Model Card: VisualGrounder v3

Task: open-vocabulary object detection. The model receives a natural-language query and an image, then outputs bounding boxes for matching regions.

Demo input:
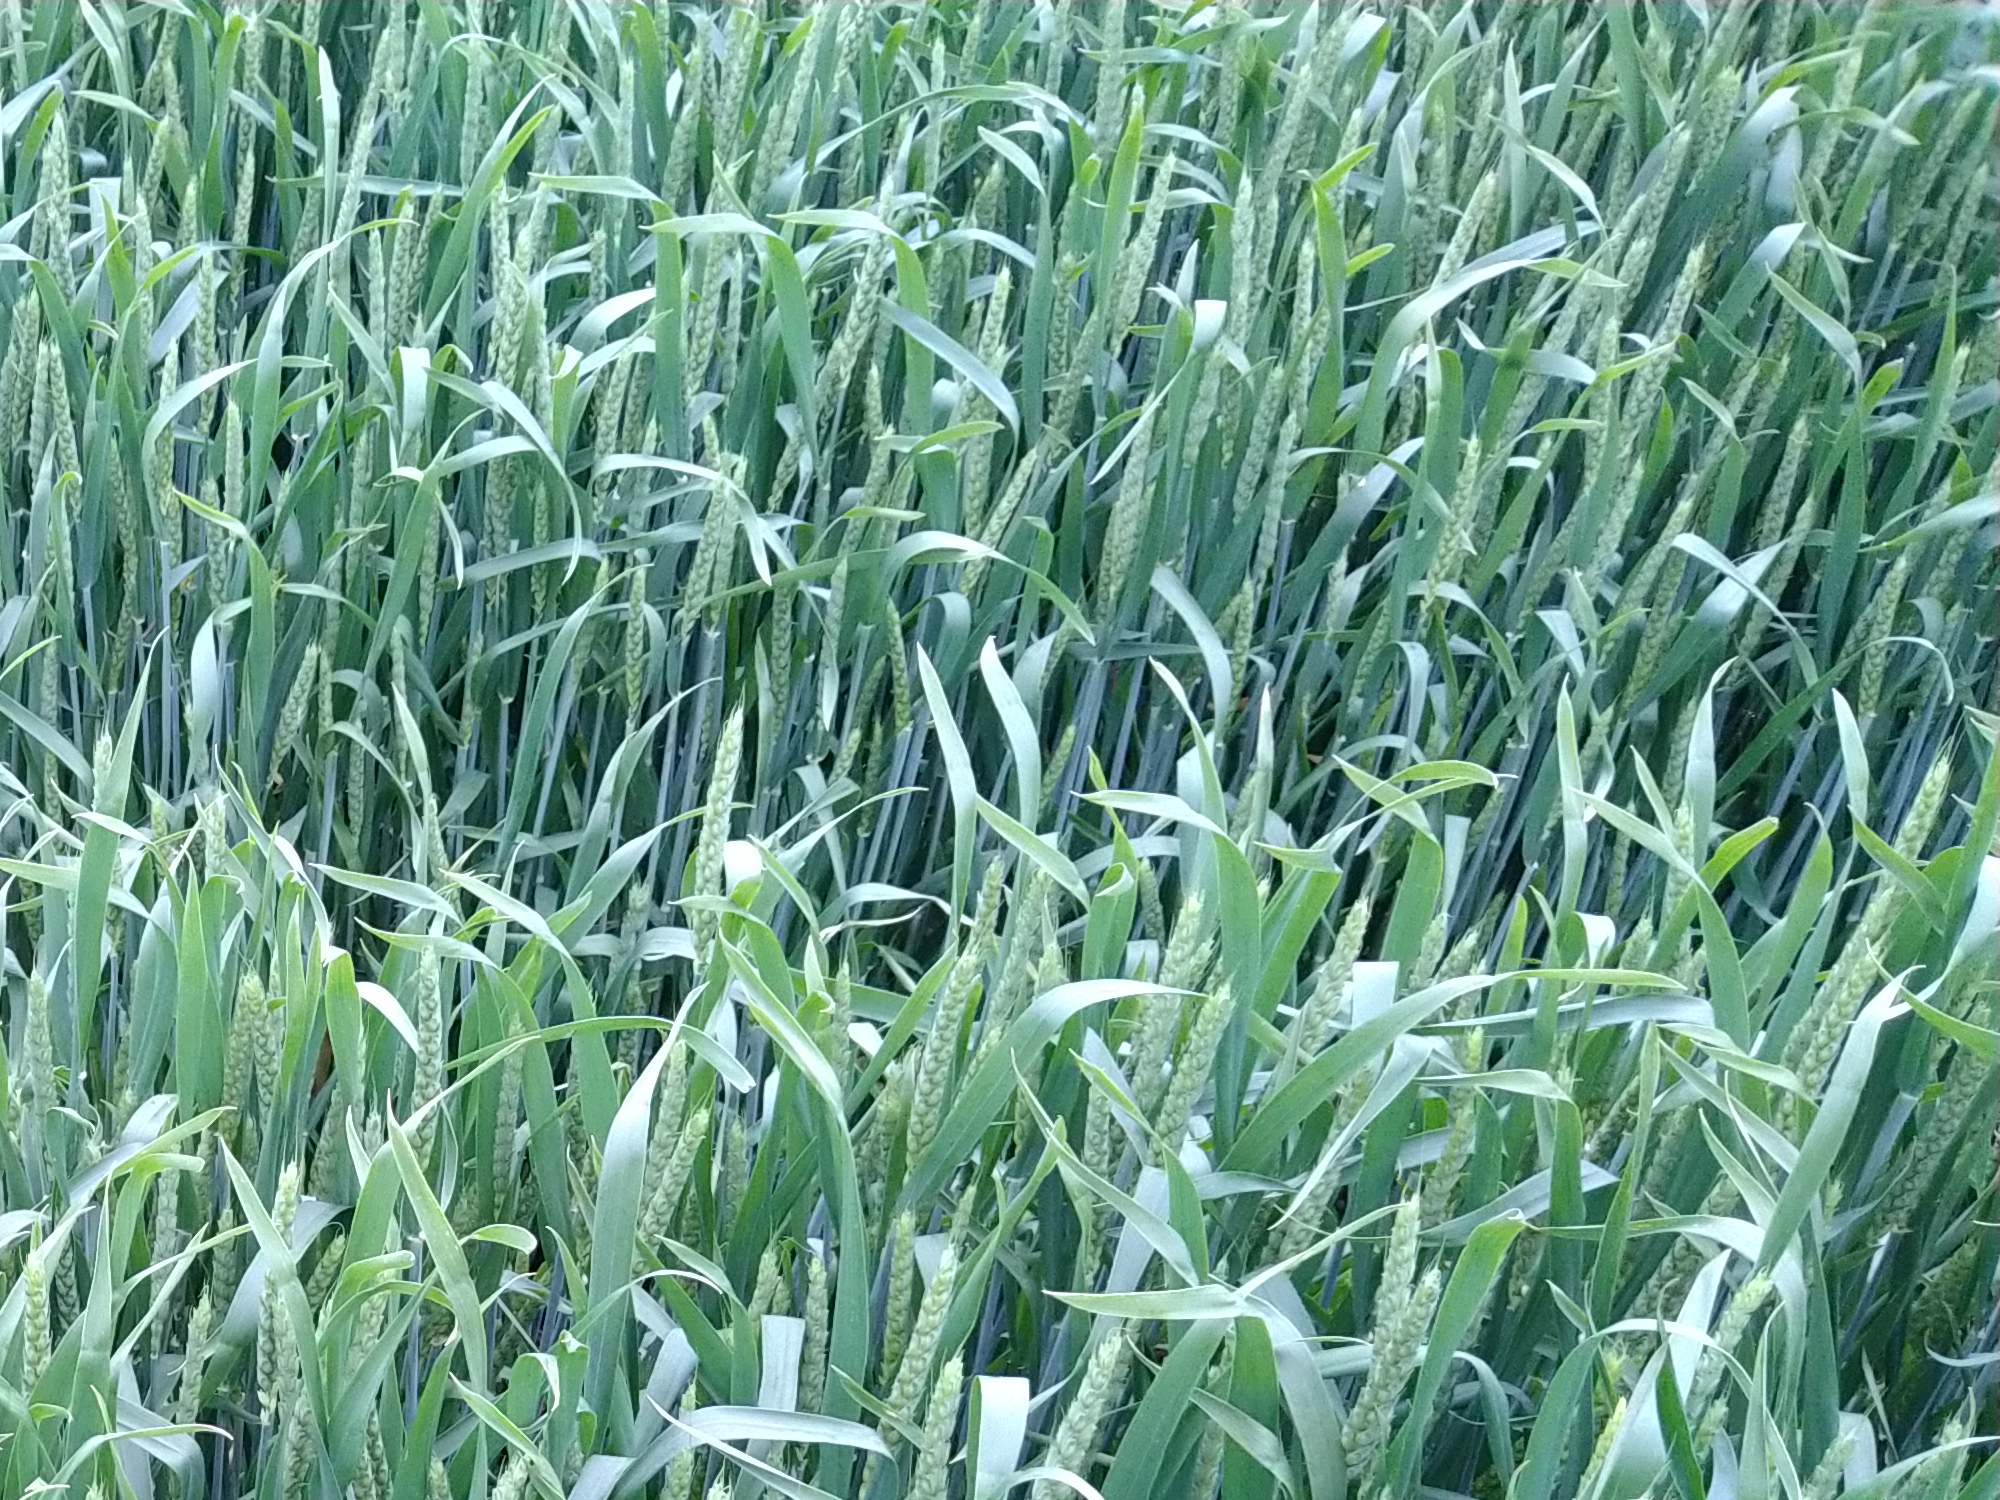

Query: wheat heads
[151,1154,180,1316]
[368,228,384,351]
[202,481,228,606]
[513,1169,542,1223]
[532,483,548,601]
[1138,862,1164,940]
[1700,359,1757,464]
[42,638,58,727]
[682,486,725,623]
[1253,417,1299,580]
[1858,560,1908,713]
[113,1020,130,1102]
[386,207,414,358]
[1731,504,1815,674]
[1421,934,1481,1023]
[749,104,782,209]
[1047,258,1074,407]
[407,191,444,305]
[349,736,364,839]
[347,432,371,586]
[54,1231,80,1335]
[972,165,1002,274]
[830,728,861,782]
[152,801,169,874]
[232,975,271,1024]
[1835,596,1879,669]
[391,624,405,693]
[106,876,125,947]
[1254,67,1311,202]
[1532,111,1610,227]
[239,23,263,154]
[389,0,405,93]
[927,245,943,316]
[308,1086,344,1197]
[1331,110,1363,210]
[408,16,426,92]
[0,351,13,471]
[450,1183,482,1237]
[703,413,721,476]
[1959,317,2000,391]
[47,118,74,300]
[680,1184,703,1296]
[929,862,1005,1022]
[1615,915,1646,995]
[226,402,244,517]
[27,976,56,1149]
[815,238,888,404]
[839,129,863,206]
[394,1037,406,1092]
[1617,252,1705,439]
[30,345,48,481]
[229,151,256,297]
[882,1213,918,1379]
[1292,306,1331,418]
[1585,1078,1642,1164]
[1826,133,1873,209]
[164,60,183,143]
[1404,916,1449,996]
[1770,246,1806,359]
[1182,347,1226,462]
[13,296,41,436]
[17,853,42,948]
[961,448,1039,588]
[1437,177,1495,284]
[1614,241,1654,320]
[195,253,217,427]
[960,20,981,87]
[243,1115,259,1178]
[1422,439,1482,606]
[648,1449,694,1500]
[1909,169,1971,256]
[113,1091,138,1139]
[1608,503,1691,641]
[1552,1410,1577,1489]
[1466,787,1502,851]
[355,33,391,137]
[1125,940,1217,1145]
[1778,891,1898,1084]
[353,1028,368,1125]
[854,658,886,728]
[274,1293,301,1410]
[1923,523,1975,599]
[48,343,82,505]
[1104,247,1130,330]
[1934,166,1988,301]
[109,589,135,687]
[1622,134,1690,279]
[1298,902,1369,1060]
[366,1408,392,1500]
[1465,38,1497,116]
[622,352,655,455]
[425,795,460,913]
[995,1341,1127,1500]
[1722,351,1755,406]
[1284,20,1350,179]
[1758,420,1809,546]
[212,1210,237,1324]
[1047,311,1101,451]
[534,304,552,433]
[1592,1357,1623,1440]
[1037,944,1069,999]
[1182,595,1240,683]
[636,1111,710,1269]
[1289,240,1316,360]
[640,1043,689,1208]
[591,349,633,506]
[773,15,823,176]
[1605,136,1635,226]
[1496,281,1597,448]
[723,1121,748,1237]
[1217,47,1239,148]
[662,53,702,206]
[1830,1433,1963,1500]
[880,1251,959,1445]
[906,955,978,1172]
[1098,505,1118,616]
[220,978,253,1133]
[496,232,533,387]
[574,562,610,665]
[687,1446,710,1500]
[136,199,153,351]
[492,1022,525,1219]
[1615,366,1646,468]
[1276,1070,1374,1262]
[1228,774,1257,841]
[798,1259,829,1415]
[980,876,1046,1048]
[29,154,52,265]
[1582,458,1645,593]
[1766,1439,1853,1500]
[768,419,805,509]
[957,1031,1002,1102]
[1107,413,1153,585]
[546,1,572,70]
[139,120,171,210]
[243,20,264,97]
[427,1457,457,1500]
[487,453,514,563]
[206,800,226,876]
[1246,196,1279,335]
[319,650,333,747]
[589,230,605,307]
[291,170,324,265]
[1149,992,1233,1162]
[860,722,885,828]
[1433,913,1498,1010]
[832,965,853,1085]
[352,1447,385,1500]
[617,985,647,1076]
[625,568,646,707]
[655,1,670,71]
[907,1358,964,1500]
[1599,559,1646,657]
[44,752,62,828]
[270,645,319,774]
[1764,2,1797,66]
[44,523,57,599]
[143,9,182,108]
[193,1126,216,1214]
[1909,1242,1978,1341]
[1058,184,1080,265]
[1694,1399,1729,1460]
[623,883,650,1015]
[176,1302,211,1428]
[329,124,374,277]
[1016,1050,1044,1144]
[570,1165,594,1269]
[1228,580,1256,707]
[865,365,883,440]
[770,571,794,735]
[699,26,716,124]
[1371,1198,1421,1352]
[1083,1084,1111,1272]
[1095,1,1126,147]
[716,23,758,160]
[1546,1026,1575,1075]
[1419,1033,1483,1229]
[1519,492,1589,620]
[279,32,290,105]
[347,1286,389,1376]
[1383,377,1417,452]
[1623,617,1646,710]
[859,1083,904,1247]
[1866,1058,1993,1240]
[1664,805,1695,924]
[1403,6,1424,91]
[1636,1107,1692,1212]
[272,1164,300,1246]
[1794,772,1952,1021]
[490,186,510,298]
[1227,175,1255,338]
[842,431,895,548]
[306,1237,347,1310]
[106,437,136,556]
[822,561,847,662]
[1690,73,1742,188]
[1796,1439,1854,1500]
[491,1294,534,1382]
[951,1185,977,1248]
[236,106,254,175]
[1803,52,1865,187]
[260,1285,293,1411]
[1894,91,1979,233]
[1696,176,1751,288]
[754,1208,772,1316]
[1704,2,1756,72]
[629,423,658,541]
[1743,359,1790,456]
[879,466,915,547]
[1685,1277,1775,1435]
[1903,484,1950,569]
[164,490,182,568]
[1352,599,1393,699]
[976,268,1008,507]
[565,1053,588,1169]
[886,600,911,727]
[1542,710,1612,832]
[1616,1188,1736,1360]
[462,57,480,178]
[690,709,743,968]
[22,1265,52,1396]
[1451,667,1482,735]
[1219,304,1248,454]
[1414,150,1446,288]
[1111,154,1176,350]
[1663,698,1699,809]
[1047,1,1069,96]
[1458,92,1495,201]
[1340,1277,1442,1477]
[417,497,441,647]
[1913,608,1962,705]
[258,1286,275,1413]
[1041,617,1075,687]
[410,947,443,1169]
[155,428,174,513]
[282,1388,316,1500]
[961,268,1011,418]
[1568,200,1643,336]
[1181,1329,1236,1500]
[685,236,725,400]
[1580,1399,1628,1493]
[1765,1446,1781,1500]
[529,108,561,186]
[461,634,479,741]
[1507,1221,1546,1309]
[1038,726,1076,807]
[1234,366,1285,520]
[1475,185,1502,256]
[247,977,279,1120]
[1325,556,1346,635]
[1628,547,1689,697]
[155,350,177,510]
[1606,827,1631,917]
[179,178,198,252]
[1466,457,1509,555]
[749,1249,780,1319]
[1475,890,1506,953]
[1582,318,1619,483]
[1928,945,1998,1077]
[721,265,741,395]
[1983,1108,2000,1184]
[610,63,635,231]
